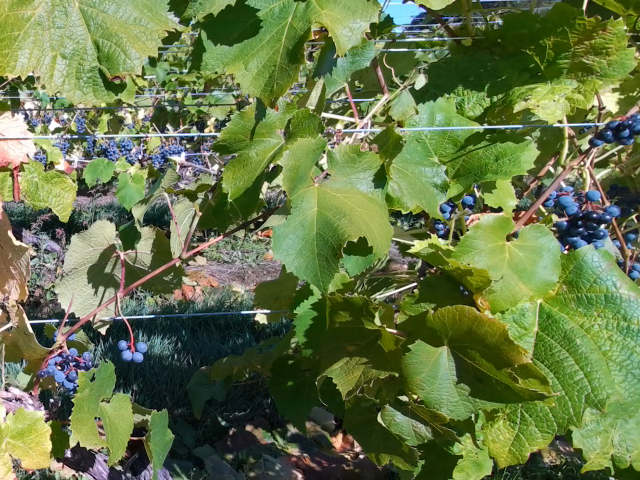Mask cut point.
Instances as JSON below:
<instances>
[{
  "label": "cut point",
  "instance_id": "7d7e1d6f",
  "mask_svg": "<svg viewBox=\"0 0 640 480\" xmlns=\"http://www.w3.org/2000/svg\"><path fill=\"white\" fill-rule=\"evenodd\" d=\"M117 303H118V309H119L120 316L122 317V320H124L125 322H128V320H126L125 316L123 315L120 298L117 299Z\"/></svg>",
  "mask_w": 640,
  "mask_h": 480
},
{
  "label": "cut point",
  "instance_id": "6a23745f",
  "mask_svg": "<svg viewBox=\"0 0 640 480\" xmlns=\"http://www.w3.org/2000/svg\"><path fill=\"white\" fill-rule=\"evenodd\" d=\"M573 170H579L586 173L584 190H587L589 186V171L586 168H581V167H577L576 169H573Z\"/></svg>",
  "mask_w": 640,
  "mask_h": 480
}]
</instances>
